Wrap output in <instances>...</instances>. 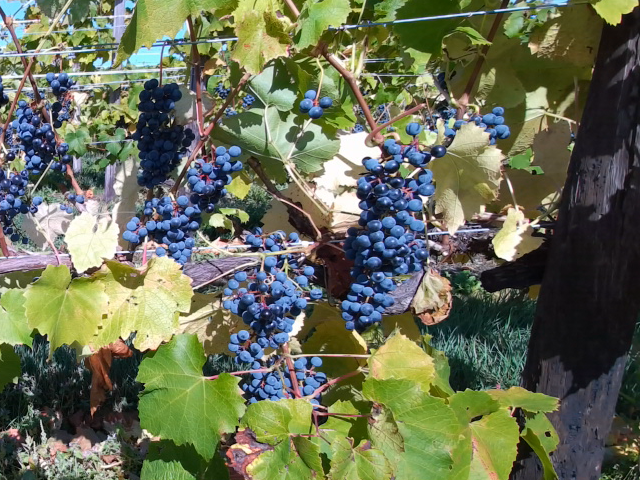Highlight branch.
<instances>
[{"label":"branch","mask_w":640,"mask_h":480,"mask_svg":"<svg viewBox=\"0 0 640 480\" xmlns=\"http://www.w3.org/2000/svg\"><path fill=\"white\" fill-rule=\"evenodd\" d=\"M192 48H193V54H194V60H195V74H196V76H195V91H196V106H197V109H198V123H199L200 138L193 145V147L191 149V152L189 154V158L185 161L183 167L181 168L180 172L178 173V176H177V178L175 180V183H174L172 189L170 190V194L171 195H174L176 193L177 189L179 188L181 180H182L185 172L187 171L188 167L193 162L195 154H196V152H197V150H198V148H199V146L201 144H202L201 154L203 156L207 155V140H206V138L209 136V134L212 131V129L215 127V125L221 119L222 115L227 110V108L231 104V102L234 99V97L240 92V90L242 88V85L245 84L250 78V74L249 73H245L239 79L236 88L228 96V98L226 99V101L223 104V106L217 112L216 117L213 119V121L210 123V125L207 126V128L205 130L204 129V121H203V107H202V103H201V88H200L201 71H200V57H199V52H198V45L197 44L196 45H192Z\"/></svg>","instance_id":"1"},{"label":"branch","mask_w":640,"mask_h":480,"mask_svg":"<svg viewBox=\"0 0 640 480\" xmlns=\"http://www.w3.org/2000/svg\"><path fill=\"white\" fill-rule=\"evenodd\" d=\"M36 60H37V58H30V60L27 62L26 58H21L22 65H23L26 73L23 75L21 81L19 82L18 88L15 91V95L13 97L12 103H11L9 109H8V114H7L6 120L4 122L2 131H1V134H0V152L3 151V145H4L5 137H6V134H7V131H8V127H9V125L11 123V120H12V117H13V112H14V110L16 108L18 99L20 97V94H21V92L23 90V87H24L25 83L27 82V79L30 82V86H31L33 95H34L36 101L38 102L37 109H38V112H39L40 117H41V122L42 123H50L51 122V118H50V115H49V113H48V111L46 109V105H45L44 101L42 100V98H41V96H40V94L38 92L35 80L33 78L31 70H30L32 68V65L34 64V62Z\"/></svg>","instance_id":"2"},{"label":"branch","mask_w":640,"mask_h":480,"mask_svg":"<svg viewBox=\"0 0 640 480\" xmlns=\"http://www.w3.org/2000/svg\"><path fill=\"white\" fill-rule=\"evenodd\" d=\"M321 55L324 56L326 58V60L333 67H335L344 76V78L347 80L348 84L350 85L351 90L357 96V99L359 101V105L361 106V108L363 110V113H364V115H365L370 127L372 129H376L377 125L375 124L374 120L372 119V114L370 113V111H369V109L367 107V102L363 98L362 93L357 89V87H356L355 83L353 82L351 76L348 74V72L342 66H340L336 61H334L333 58L326 51H322Z\"/></svg>","instance_id":"3"},{"label":"branch","mask_w":640,"mask_h":480,"mask_svg":"<svg viewBox=\"0 0 640 480\" xmlns=\"http://www.w3.org/2000/svg\"><path fill=\"white\" fill-rule=\"evenodd\" d=\"M484 63V57L480 56L475 64V67L473 68V71L471 73L470 79L468 81V83L466 84L463 93L460 96L459 102H458V115L456 116L457 120H462L464 115H467L469 113V100L468 97L470 95V93L472 92V88L474 87V84L477 80V77L480 73V70L482 68V65Z\"/></svg>","instance_id":"4"},{"label":"branch","mask_w":640,"mask_h":480,"mask_svg":"<svg viewBox=\"0 0 640 480\" xmlns=\"http://www.w3.org/2000/svg\"><path fill=\"white\" fill-rule=\"evenodd\" d=\"M323 244H324L323 240H318L316 244L310 245V246H308L306 248H289V249H286L284 251L271 252V253H246V252H241V251H230L229 255L230 256L243 257V258H256V257L274 258V257L286 256V255H289L291 253H308V252L314 250L316 247H318L320 245H323Z\"/></svg>","instance_id":"5"},{"label":"branch","mask_w":640,"mask_h":480,"mask_svg":"<svg viewBox=\"0 0 640 480\" xmlns=\"http://www.w3.org/2000/svg\"><path fill=\"white\" fill-rule=\"evenodd\" d=\"M73 2H74V0H68L63 5V8L58 12V14L55 16L53 22L49 26V28H48V30L46 32V35L42 38V40L38 43V45L34 49L35 53H39L41 51L42 47L44 46V44H46L47 41L50 39L51 34H52L53 30L55 29L56 25L58 24L59 20L64 15V13L68 10V8L73 4Z\"/></svg>","instance_id":"6"},{"label":"branch","mask_w":640,"mask_h":480,"mask_svg":"<svg viewBox=\"0 0 640 480\" xmlns=\"http://www.w3.org/2000/svg\"><path fill=\"white\" fill-rule=\"evenodd\" d=\"M0 19L3 21L4 25L6 26L9 32V37H10L12 46L15 48V50L18 53H22L24 51V48L19 43L14 25L12 24L10 18L7 16V14L5 13L2 7H0Z\"/></svg>","instance_id":"7"},{"label":"branch","mask_w":640,"mask_h":480,"mask_svg":"<svg viewBox=\"0 0 640 480\" xmlns=\"http://www.w3.org/2000/svg\"><path fill=\"white\" fill-rule=\"evenodd\" d=\"M282 349H283L284 357H285V360H286V365L290 369L288 371V375H289L290 381H291V383L293 385L292 389L294 391L295 398L299 399L300 398V392H299V389H298V386H297V383H296L297 374H296V371H295L294 364L291 363V357H290L289 350H288V347H287L286 343L282 344Z\"/></svg>","instance_id":"8"},{"label":"branch","mask_w":640,"mask_h":480,"mask_svg":"<svg viewBox=\"0 0 640 480\" xmlns=\"http://www.w3.org/2000/svg\"><path fill=\"white\" fill-rule=\"evenodd\" d=\"M74 176V172L71 170V164H66V179L70 182L72 188L76 192L77 195H81L83 190L78 186Z\"/></svg>","instance_id":"9"},{"label":"branch","mask_w":640,"mask_h":480,"mask_svg":"<svg viewBox=\"0 0 640 480\" xmlns=\"http://www.w3.org/2000/svg\"><path fill=\"white\" fill-rule=\"evenodd\" d=\"M503 16H504V13L497 14V16L495 17L494 21L492 22V25H491V28L489 30L488 37H487V40L489 42L493 41V38H494L495 34L497 33L499 24L502 21V17Z\"/></svg>","instance_id":"10"},{"label":"branch","mask_w":640,"mask_h":480,"mask_svg":"<svg viewBox=\"0 0 640 480\" xmlns=\"http://www.w3.org/2000/svg\"><path fill=\"white\" fill-rule=\"evenodd\" d=\"M381 136H382V133H381V132H378V133L375 135V142L377 143L378 149H379L380 153L382 154L383 158H384L386 161H389V160H390V157H389L388 153L386 152V150H385V148H384V146H383V144H382V143L384 142V138H383V137H381Z\"/></svg>","instance_id":"11"},{"label":"branch","mask_w":640,"mask_h":480,"mask_svg":"<svg viewBox=\"0 0 640 480\" xmlns=\"http://www.w3.org/2000/svg\"><path fill=\"white\" fill-rule=\"evenodd\" d=\"M287 8L294 18H298L300 15V10L297 5L292 0H285Z\"/></svg>","instance_id":"12"},{"label":"branch","mask_w":640,"mask_h":480,"mask_svg":"<svg viewBox=\"0 0 640 480\" xmlns=\"http://www.w3.org/2000/svg\"><path fill=\"white\" fill-rule=\"evenodd\" d=\"M187 19H188V28H189V32H190V39L194 40V39H196V36H195V29H194V25H193V17L191 15H188Z\"/></svg>","instance_id":"13"}]
</instances>
